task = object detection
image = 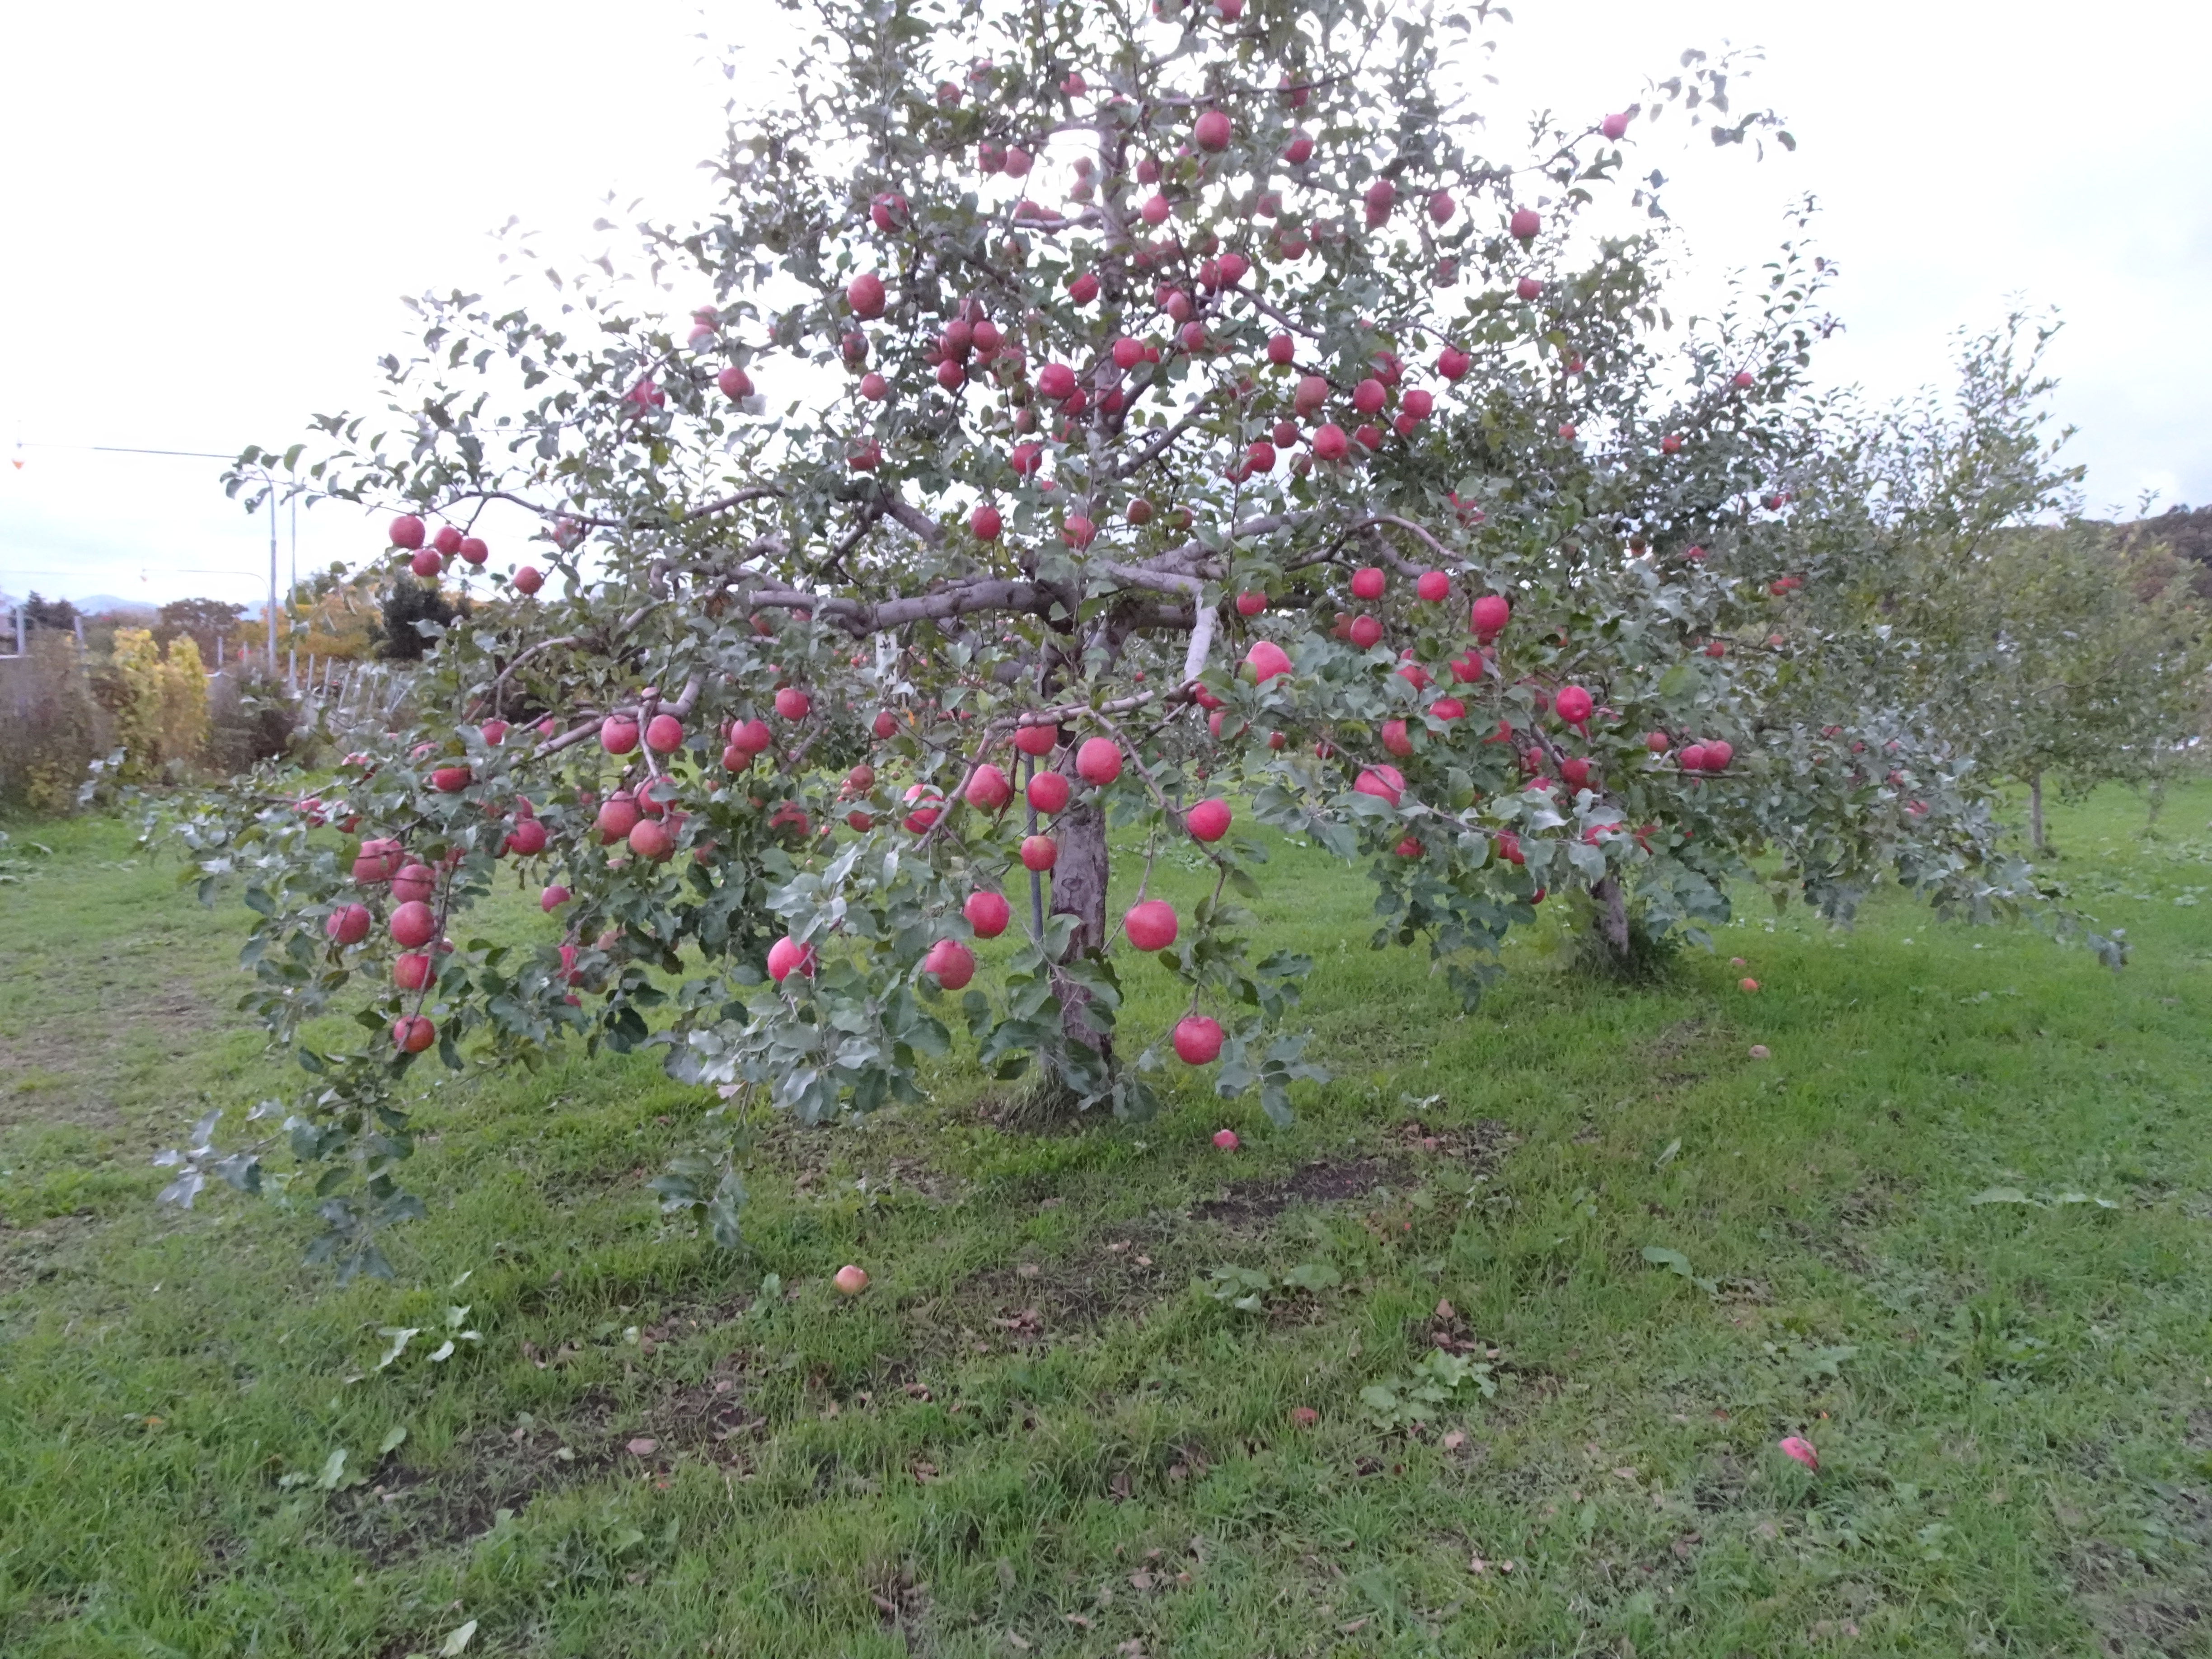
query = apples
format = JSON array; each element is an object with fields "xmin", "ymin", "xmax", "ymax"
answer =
[
  {"xmin": 1381, "ymin": 717, "xmax": 1425, "ymax": 759},
  {"xmin": 1059, "ymin": 70, "xmax": 1089, "ymax": 99},
  {"xmin": 1702, "ymin": 737, "xmax": 1732, "ymax": 769},
  {"xmin": 1522, "ymin": 671, "xmax": 1567, "ymax": 707},
  {"xmin": 849, "ymin": 655, "xmax": 863, "ymax": 670},
  {"xmin": 775, "ymin": 747, "xmax": 803, "ymax": 772},
  {"xmin": 1105, "ymin": 96, "xmax": 1134, "ymax": 131},
  {"xmin": 1207, "ymin": 0, "xmax": 1244, "ymax": 26},
  {"xmin": 1308, "ymin": 216, "xmax": 1338, "ymax": 247},
  {"xmin": 597, "ymin": 799, "xmax": 639, "ymax": 837},
  {"xmin": 819, "ymin": 823, "xmax": 832, "ymax": 838},
  {"xmin": 843, "ymin": 434, "xmax": 882, "ymax": 470},
  {"xmin": 1213, "ymin": 249, "xmax": 1250, "ymax": 285},
  {"xmin": 1037, "ymin": 360, "xmax": 1075, "ymax": 404},
  {"xmin": 1264, "ymin": 333, "xmax": 1295, "ymax": 367},
  {"xmin": 749, "ymin": 610, "xmax": 780, "ymax": 642},
  {"xmin": 1349, "ymin": 613, "xmax": 1385, "ymax": 650},
  {"xmin": 963, "ymin": 761, "xmax": 1012, "ymax": 817},
  {"xmin": 1322, "ymin": 235, "xmax": 1356, "ymax": 263},
  {"xmin": 1369, "ymin": 351, "xmax": 1405, "ymax": 386},
  {"xmin": 1523, "ymin": 883, "xmax": 1547, "ymax": 907},
  {"xmin": 830, "ymin": 643, "xmax": 844, "ymax": 664},
  {"xmin": 840, "ymin": 786, "xmax": 859, "ymax": 800},
  {"xmin": 1004, "ymin": 380, "xmax": 1034, "ymax": 407},
  {"xmin": 1633, "ymin": 824, "xmax": 1665, "ymax": 849},
  {"xmin": 393, "ymin": 1013, "xmax": 437, "ymax": 1055},
  {"xmin": 1012, "ymin": 713, "xmax": 1059, "ymax": 759},
  {"xmin": 1703, "ymin": 641, "xmax": 1726, "ymax": 661},
  {"xmin": 1018, "ymin": 833, "xmax": 1060, "ymax": 874},
  {"xmin": 1151, "ymin": 0, "xmax": 1192, "ymax": 25},
  {"xmin": 1783, "ymin": 486, "xmax": 1798, "ymax": 502},
  {"xmin": 772, "ymin": 797, "xmax": 803, "ymax": 820},
  {"xmin": 1278, "ymin": 230, "xmax": 1309, "ymax": 263},
  {"xmin": 1431, "ymin": 258, "xmax": 1458, "ymax": 289},
  {"xmin": 469, "ymin": 792, "xmax": 504, "ymax": 824},
  {"xmin": 527, "ymin": 713, "xmax": 562, "ymax": 743},
  {"xmin": 915, "ymin": 657, "xmax": 933, "ymax": 672},
  {"xmin": 1137, "ymin": 158, "xmax": 1161, "ymax": 185},
  {"xmin": 1811, "ymin": 751, "xmax": 1828, "ymax": 768},
  {"xmin": 609, "ymin": 790, "xmax": 638, "ymax": 816},
  {"xmin": 1124, "ymin": 900, "xmax": 1180, "ymax": 952},
  {"xmin": 619, "ymin": 391, "xmax": 645, "ymax": 420},
  {"xmin": 1848, "ymin": 740, "xmax": 1865, "ymax": 756},
  {"xmin": 1557, "ymin": 420, "xmax": 1581, "ymax": 443},
  {"xmin": 428, "ymin": 761, "xmax": 473, "ymax": 794},
  {"xmin": 1193, "ymin": 231, "xmax": 1219, "ymax": 257},
  {"xmin": 970, "ymin": 505, "xmax": 1002, "ymax": 542},
  {"xmin": 1180, "ymin": 319, "xmax": 1206, "ymax": 355},
  {"xmin": 694, "ymin": 302, "xmax": 725, "ymax": 331},
  {"xmin": 571, "ymin": 787, "xmax": 598, "ymax": 810},
  {"xmin": 793, "ymin": 602, "xmax": 813, "ymax": 630},
  {"xmin": 1820, "ymin": 721, "xmax": 1845, "ymax": 744},
  {"xmin": 1289, "ymin": 451, "xmax": 1315, "ymax": 479},
  {"xmin": 1272, "ymin": 422, "xmax": 1298, "ymax": 450},
  {"xmin": 1170, "ymin": 289, "xmax": 1197, "ymax": 325},
  {"xmin": 1523, "ymin": 776, "xmax": 1569, "ymax": 819},
  {"xmin": 1661, "ymin": 433, "xmax": 1682, "ymax": 455},
  {"xmin": 1602, "ymin": 112, "xmax": 1630, "ymax": 140},
  {"xmin": 847, "ymin": 272, "xmax": 886, "ymax": 321},
  {"xmin": 1895, "ymin": 768, "xmax": 1911, "ymax": 783},
  {"xmin": 325, "ymin": 902, "xmax": 372, "ymax": 946},
  {"xmin": 1428, "ymin": 191, "xmax": 1456, "ymax": 227},
  {"xmin": 1677, "ymin": 724, "xmax": 1700, "ymax": 740},
  {"xmin": 1786, "ymin": 575, "xmax": 1807, "ymax": 596},
  {"xmin": 922, "ymin": 937, "xmax": 975, "ymax": 993},
  {"xmin": 838, "ymin": 329, "xmax": 868, "ymax": 364},
  {"xmin": 1350, "ymin": 422, "xmax": 1382, "ymax": 457},
  {"xmin": 440, "ymin": 842, "xmax": 471, "ymax": 872},
  {"xmin": 996, "ymin": 739, "xmax": 1010, "ymax": 753},
  {"xmin": 1392, "ymin": 832, "xmax": 1426, "ymax": 865},
  {"xmin": 634, "ymin": 381, "xmax": 667, "ymax": 416},
  {"xmin": 1390, "ymin": 664, "xmax": 1424, "ymax": 697},
  {"xmin": 1198, "ymin": 258, "xmax": 1228, "ymax": 292},
  {"xmin": 768, "ymin": 314, "xmax": 798, "ymax": 345},
  {"xmin": 1555, "ymin": 684, "xmax": 1594, "ymax": 726},
  {"xmin": 1315, "ymin": 737, "xmax": 1336, "ymax": 762},
  {"xmin": 1910, "ymin": 792, "xmax": 1930, "ymax": 813},
  {"xmin": 1734, "ymin": 370, "xmax": 1753, "ymax": 389},
  {"xmin": 1559, "ymin": 538, "xmax": 1583, "ymax": 563},
  {"xmin": 706, "ymin": 596, "xmax": 732, "ymax": 621},
  {"xmin": 770, "ymin": 811, "xmax": 811, "ymax": 847},
  {"xmin": 1208, "ymin": 705, "xmax": 1252, "ymax": 741},
  {"xmin": 1165, "ymin": 505, "xmax": 1194, "ymax": 532},
  {"xmin": 506, "ymin": 817, "xmax": 547, "ymax": 853},
  {"xmin": 1262, "ymin": 726, "xmax": 1286, "ymax": 752},
  {"xmin": 1328, "ymin": 610, "xmax": 1359, "ymax": 644},
  {"xmin": 1353, "ymin": 762, "xmax": 1406, "ymax": 810},
  {"xmin": 388, "ymin": 900, "xmax": 436, "ymax": 950},
  {"xmin": 1069, "ymin": 178, "xmax": 1096, "ymax": 205},
  {"xmin": 1394, "ymin": 414, "xmax": 1425, "ymax": 447},
  {"xmin": 959, "ymin": 705, "xmax": 979, "ymax": 724},
  {"xmin": 1184, "ymin": 797, "xmax": 1233, "ymax": 844},
  {"xmin": 1401, "ymin": 389, "xmax": 1433, "ymax": 420},
  {"xmin": 1226, "ymin": 371, "xmax": 1256, "ymax": 406},
  {"xmin": 1593, "ymin": 709, "xmax": 1620, "ymax": 732},
  {"xmin": 1209, "ymin": 328, "xmax": 1239, "ymax": 357},
  {"xmin": 1060, "ymin": 514, "xmax": 1095, "ymax": 552},
  {"xmin": 1437, "ymin": 344, "xmax": 1460, "ymax": 381},
  {"xmin": 768, "ymin": 658, "xmax": 788, "ymax": 677},
  {"xmin": 890, "ymin": 705, "xmax": 915, "ymax": 734},
  {"xmin": 1071, "ymin": 155, "xmax": 1100, "ymax": 181},
  {"xmin": 1005, "ymin": 734, "xmax": 1017, "ymax": 750},
  {"xmin": 393, "ymin": 863, "xmax": 442, "ymax": 907},
  {"xmin": 967, "ymin": 57, "xmax": 998, "ymax": 91},
  {"xmin": 292, "ymin": 799, "xmax": 326, "ymax": 829},
  {"xmin": 1172, "ymin": 1016, "xmax": 1222, "ymax": 1066},
  {"xmin": 1294, "ymin": 390, "xmax": 1320, "ymax": 419},
  {"xmin": 746, "ymin": 787, "xmax": 769, "ymax": 810},
  {"xmin": 643, "ymin": 925, "xmax": 678, "ymax": 959},
  {"xmin": 1352, "ymin": 377, "xmax": 1386, "ymax": 415},
  {"xmin": 846, "ymin": 801, "xmax": 881, "ymax": 836},
  {"xmin": 1416, "ymin": 570, "xmax": 1452, "ymax": 603},
  {"xmin": 1686, "ymin": 544, "xmax": 1712, "ymax": 562},
  {"xmin": 1439, "ymin": 490, "xmax": 1479, "ymax": 521},
  {"xmin": 899, "ymin": 782, "xmax": 948, "ymax": 835},
  {"xmin": 1035, "ymin": 208, "xmax": 1064, "ymax": 238},
  {"xmin": 1310, "ymin": 422, "xmax": 1349, "ymax": 462},
  {"xmin": 1581, "ymin": 818, "xmax": 1623, "ymax": 854},
  {"xmin": 1426, "ymin": 694, "xmax": 1467, "ymax": 731},
  {"xmin": 427, "ymin": 935, "xmax": 456, "ymax": 957},
  {"xmin": 691, "ymin": 835, "xmax": 724, "ymax": 870},
  {"xmin": 1673, "ymin": 823, "xmax": 1694, "ymax": 843},
  {"xmin": 1366, "ymin": 180, "xmax": 1400, "ymax": 213},
  {"xmin": 411, "ymin": 548, "xmax": 441, "ymax": 578},
  {"xmin": 478, "ymin": 829, "xmax": 512, "ymax": 859},
  {"xmin": 973, "ymin": 320, "xmax": 999, "ymax": 354},
  {"xmin": 1012, "ymin": 445, "xmax": 1044, "ymax": 476},
  {"xmin": 1049, "ymin": 417, "xmax": 1082, "ymax": 443},
  {"xmin": 1490, "ymin": 828, "xmax": 1516, "ymax": 858},
  {"xmin": 1277, "ymin": 71, "xmax": 1310, "ymax": 110},
  {"xmin": 433, "ymin": 525, "xmax": 461, "ymax": 558},
  {"xmin": 1075, "ymin": 735, "xmax": 1124, "ymax": 785},
  {"xmin": 996, "ymin": 341, "xmax": 1029, "ymax": 384},
  {"xmin": 511, "ymin": 565, "xmax": 543, "ymax": 594},
  {"xmin": 1014, "ymin": 409, "xmax": 1038, "ymax": 435},
  {"xmin": 371, "ymin": 835, "xmax": 406, "ymax": 867},
  {"xmin": 1003, "ymin": 634, "xmax": 1014, "ymax": 648},
  {"xmin": 944, "ymin": 320, "xmax": 971, "ymax": 353},
  {"xmin": 352, "ymin": 842, "xmax": 397, "ymax": 887},
  {"xmin": 1629, "ymin": 536, "xmax": 1647, "ymax": 557},
  {"xmin": 601, "ymin": 856, "xmax": 632, "ymax": 887},
  {"xmin": 638, "ymin": 775, "xmax": 678, "ymax": 820},
  {"xmin": 719, "ymin": 712, "xmax": 748, "ymax": 745},
  {"xmin": 849, "ymin": 764, "xmax": 876, "ymax": 791},
  {"xmin": 728, "ymin": 717, "xmax": 771, "ymax": 757},
  {"xmin": 1141, "ymin": 194, "xmax": 1172, "ymax": 226},
  {"xmin": 1399, "ymin": 644, "xmax": 1432, "ymax": 676},
  {"xmin": 1297, "ymin": 375, "xmax": 1330, "ymax": 409},
  {"xmin": 1557, "ymin": 752, "xmax": 1591, "ymax": 786},
  {"xmin": 1246, "ymin": 440, "xmax": 1276, "ymax": 474},
  {"xmin": 332, "ymin": 797, "xmax": 365, "ymax": 835},
  {"xmin": 905, "ymin": 642, "xmax": 921, "ymax": 660},
  {"xmin": 719, "ymin": 670, "xmax": 739, "ymax": 691},
  {"xmin": 1643, "ymin": 730, "xmax": 1669, "ymax": 754},
  {"xmin": 1762, "ymin": 491, "xmax": 1785, "ymax": 512},
  {"xmin": 1237, "ymin": 587, "xmax": 1269, "ymax": 620},
  {"xmin": 1130, "ymin": 668, "xmax": 1147, "ymax": 684},
  {"xmin": 388, "ymin": 512, "xmax": 426, "ymax": 551},
  {"xmin": 927, "ymin": 695, "xmax": 938, "ymax": 707},
  {"xmin": 774, "ymin": 685, "xmax": 809, "ymax": 723},
  {"xmin": 589, "ymin": 818, "xmax": 622, "ymax": 851},
  {"xmin": 1201, "ymin": 692, "xmax": 1224, "ymax": 713},
  {"xmin": 1125, "ymin": 496, "xmax": 1155, "ymax": 526},
  {"xmin": 765, "ymin": 932, "xmax": 827, "ymax": 985},
  {"xmin": 859, "ymin": 372, "xmax": 888, "ymax": 402},
  {"xmin": 721, "ymin": 744, "xmax": 750, "ymax": 772},
  {"xmin": 1036, "ymin": 476, "xmax": 1060, "ymax": 503},
  {"xmin": 1152, "ymin": 282, "xmax": 1184, "ymax": 314},
  {"xmin": 1885, "ymin": 740, "xmax": 1899, "ymax": 755},
  {"xmin": 1254, "ymin": 187, "xmax": 1284, "ymax": 221},
  {"xmin": 1196, "ymin": 682, "xmax": 1216, "ymax": 706},
  {"xmin": 934, "ymin": 80, "xmax": 961, "ymax": 111},
  {"xmin": 1178, "ymin": 141, "xmax": 1203, "ymax": 180},
  {"xmin": 874, "ymin": 711, "xmax": 902, "ymax": 742},
  {"xmin": 1025, "ymin": 770, "xmax": 1069, "ymax": 815},
  {"xmin": 1479, "ymin": 714, "xmax": 1514, "ymax": 748},
  {"xmin": 664, "ymin": 807, "xmax": 696, "ymax": 842},
  {"xmin": 1276, "ymin": 124, "xmax": 1314, "ymax": 165},
  {"xmin": 1560, "ymin": 360, "xmax": 1587, "ymax": 376},
  {"xmin": 936, "ymin": 359, "xmax": 969, "ymax": 393},
  {"xmin": 597, "ymin": 929, "xmax": 638, "ymax": 965},
  {"xmin": 685, "ymin": 323, "xmax": 716, "ymax": 355},
  {"xmin": 1009, "ymin": 199, "xmax": 1041, "ymax": 229},
  {"xmin": 540, "ymin": 886, "xmax": 572, "ymax": 917},
  {"xmin": 554, "ymin": 994, "xmax": 582, "ymax": 1017},
  {"xmin": 1089, "ymin": 383, "xmax": 1124, "ymax": 416},
  {"xmin": 914, "ymin": 344, "xmax": 940, "ymax": 368},
  {"xmin": 552, "ymin": 520, "xmax": 583, "ymax": 549},
  {"xmin": 640, "ymin": 684, "xmax": 665, "ymax": 707},
  {"xmin": 1001, "ymin": 239, "xmax": 1025, "ymax": 268},
  {"xmin": 340, "ymin": 751, "xmax": 379, "ymax": 791},
  {"xmin": 1517, "ymin": 745, "xmax": 1556, "ymax": 777},
  {"xmin": 962, "ymin": 890, "xmax": 1010, "ymax": 940},
  {"xmin": 1269, "ymin": 219, "xmax": 1302, "ymax": 249},
  {"xmin": 1680, "ymin": 742, "xmax": 1705, "ymax": 772},
  {"xmin": 411, "ymin": 741, "xmax": 451, "ymax": 772},
  {"xmin": 843, "ymin": 701, "xmax": 856, "ymax": 712},
  {"xmin": 550, "ymin": 947, "xmax": 585, "ymax": 989},
  {"xmin": 1226, "ymin": 452, "xmax": 1252, "ymax": 485},
  {"xmin": 1350, "ymin": 564, "xmax": 1385, "ymax": 601},
  {"xmin": 704, "ymin": 774, "xmax": 725, "ymax": 798},
  {"xmin": 459, "ymin": 538, "xmax": 489, "ymax": 565},
  {"xmin": 599, "ymin": 712, "xmax": 640, "ymax": 757},
  {"xmin": 1516, "ymin": 275, "xmax": 1545, "ymax": 302},
  {"xmin": 949, "ymin": 297, "xmax": 987, "ymax": 331},
  {"xmin": 1195, "ymin": 109, "xmax": 1231, "ymax": 153},
  {"xmin": 391, "ymin": 952, "xmax": 442, "ymax": 995},
  {"xmin": 975, "ymin": 136, "xmax": 1008, "ymax": 174},
  {"xmin": 1547, "ymin": 624, "xmax": 1573, "ymax": 648},
  {"xmin": 1068, "ymin": 271, "xmax": 1100, "ymax": 305},
  {"xmin": 1447, "ymin": 648, "xmax": 1485, "ymax": 686},
  {"xmin": 1112, "ymin": 336, "xmax": 1147, "ymax": 370},
  {"xmin": 1767, "ymin": 632, "xmax": 1787, "ymax": 650},
  {"xmin": 644, "ymin": 712, "xmax": 683, "ymax": 756},
  {"xmin": 627, "ymin": 815, "xmax": 670, "ymax": 861},
  {"xmin": 1003, "ymin": 148, "xmax": 1032, "ymax": 181},
  {"xmin": 975, "ymin": 343, "xmax": 1007, "ymax": 367},
  {"xmin": 1236, "ymin": 639, "xmax": 1292, "ymax": 699},
  {"xmin": 1366, "ymin": 205, "xmax": 1392, "ymax": 228},
  {"xmin": 940, "ymin": 327, "xmax": 970, "ymax": 364},
  {"xmin": 498, "ymin": 794, "xmax": 534, "ymax": 829},
  {"xmin": 1507, "ymin": 835, "xmax": 1538, "ymax": 864},
  {"xmin": 871, "ymin": 191, "xmax": 910, "ymax": 235},
  {"xmin": 1131, "ymin": 238, "xmax": 1163, "ymax": 270},
  {"xmin": 475, "ymin": 719, "xmax": 514, "ymax": 760},
  {"xmin": 1352, "ymin": 319, "xmax": 1380, "ymax": 348},
  {"xmin": 1768, "ymin": 571, "xmax": 1791, "ymax": 596},
  {"xmin": 717, "ymin": 367, "xmax": 751, "ymax": 404},
  {"xmin": 1470, "ymin": 594, "xmax": 1510, "ymax": 633},
  {"xmin": 1510, "ymin": 208, "xmax": 1542, "ymax": 240}
]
